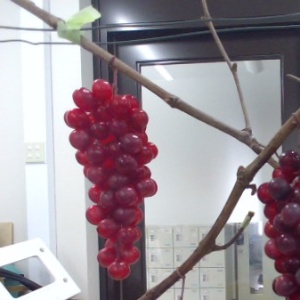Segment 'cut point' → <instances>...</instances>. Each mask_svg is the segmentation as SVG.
<instances>
[{"label": "cut point", "instance_id": "cut-point-1", "mask_svg": "<svg viewBox=\"0 0 300 300\" xmlns=\"http://www.w3.org/2000/svg\"><path fill=\"white\" fill-rule=\"evenodd\" d=\"M109 68L114 72V80L112 83L113 89H114V95H118V85H117V74L118 71L113 65H109Z\"/></svg>", "mask_w": 300, "mask_h": 300}]
</instances>
